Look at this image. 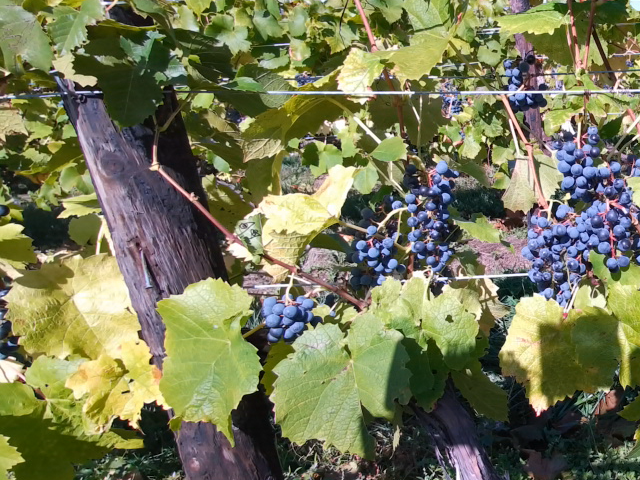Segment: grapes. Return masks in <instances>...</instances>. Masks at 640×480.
Wrapping results in <instances>:
<instances>
[{
    "label": "grapes",
    "mask_w": 640,
    "mask_h": 480,
    "mask_svg": "<svg viewBox=\"0 0 640 480\" xmlns=\"http://www.w3.org/2000/svg\"><path fill=\"white\" fill-rule=\"evenodd\" d=\"M416 171L417 167L414 164H407L405 166L406 173L402 177L403 185L411 190L404 197V201L407 203V211L410 214H415L418 211V205L415 202L419 195L428 199H434L438 196L440 200L439 202H433L432 200L426 202L424 204L426 211H419L417 217H409L407 224L410 227H418L422 223V228L429 232L430 239L438 241L442 236V232L446 235L451 233L449 223L446 220L450 217L448 205L453 201L451 190L455 188L453 180H441V176L457 178L459 171L449 168L447 161H439L436 164V170L431 172L430 181L433 184L430 187L423 184L418 185V179L413 176Z\"/></svg>",
    "instance_id": "b958b902"
},
{
    "label": "grapes",
    "mask_w": 640,
    "mask_h": 480,
    "mask_svg": "<svg viewBox=\"0 0 640 480\" xmlns=\"http://www.w3.org/2000/svg\"><path fill=\"white\" fill-rule=\"evenodd\" d=\"M534 63L535 57L533 55H528L526 57V61L521 60L518 67H514L512 69L513 60L511 58H506L503 61V67L505 68L504 73L507 78H510L507 81V89L518 90L519 86L524 82V78L521 76V73L527 72L529 70V65H533Z\"/></svg>",
    "instance_id": "5460f4e3"
},
{
    "label": "grapes",
    "mask_w": 640,
    "mask_h": 480,
    "mask_svg": "<svg viewBox=\"0 0 640 480\" xmlns=\"http://www.w3.org/2000/svg\"><path fill=\"white\" fill-rule=\"evenodd\" d=\"M423 237V230L421 228H417L416 230H411L407 239L411 243V252L414 254V257L417 260L425 259V263L428 266H432V271L434 273H439L444 267L445 263H447L451 256L455 253V250L452 247H449L447 242H441L438 245V260L434 256H427L426 252H434L436 250V244L434 242L425 243L421 239Z\"/></svg>",
    "instance_id": "f8a65327"
},
{
    "label": "grapes",
    "mask_w": 640,
    "mask_h": 480,
    "mask_svg": "<svg viewBox=\"0 0 640 480\" xmlns=\"http://www.w3.org/2000/svg\"><path fill=\"white\" fill-rule=\"evenodd\" d=\"M508 103L513 113H516L517 111H526L528 108L544 109L547 106V99L541 94L511 95L508 98Z\"/></svg>",
    "instance_id": "83cd7487"
},
{
    "label": "grapes",
    "mask_w": 640,
    "mask_h": 480,
    "mask_svg": "<svg viewBox=\"0 0 640 480\" xmlns=\"http://www.w3.org/2000/svg\"><path fill=\"white\" fill-rule=\"evenodd\" d=\"M360 216L362 219L358 221V226L361 229H366L368 235H375L377 233V227L370 225V219L374 217L373 211L369 207H364L360 210Z\"/></svg>",
    "instance_id": "e5b3c951"
},
{
    "label": "grapes",
    "mask_w": 640,
    "mask_h": 480,
    "mask_svg": "<svg viewBox=\"0 0 640 480\" xmlns=\"http://www.w3.org/2000/svg\"><path fill=\"white\" fill-rule=\"evenodd\" d=\"M630 265V258L626 255H620L618 260L610 257L605 261V267L609 273H617L620 268H626Z\"/></svg>",
    "instance_id": "2adb6a1f"
},
{
    "label": "grapes",
    "mask_w": 640,
    "mask_h": 480,
    "mask_svg": "<svg viewBox=\"0 0 640 480\" xmlns=\"http://www.w3.org/2000/svg\"><path fill=\"white\" fill-rule=\"evenodd\" d=\"M260 316L265 319L264 323L269 332L265 339L269 343H277L282 339L286 342L296 340L308 329L307 323L312 327L323 321L321 316L313 315L311 311L314 301L305 295H298L295 304L287 306L284 302L278 301L270 296L261 302Z\"/></svg>",
    "instance_id": "0513c4c2"
},
{
    "label": "grapes",
    "mask_w": 640,
    "mask_h": 480,
    "mask_svg": "<svg viewBox=\"0 0 640 480\" xmlns=\"http://www.w3.org/2000/svg\"><path fill=\"white\" fill-rule=\"evenodd\" d=\"M383 200L387 203V204H391V208L393 210H400L403 206V202L399 199H395V197L393 195L387 194L383 197Z\"/></svg>",
    "instance_id": "ef6de9ee"
},
{
    "label": "grapes",
    "mask_w": 640,
    "mask_h": 480,
    "mask_svg": "<svg viewBox=\"0 0 640 480\" xmlns=\"http://www.w3.org/2000/svg\"><path fill=\"white\" fill-rule=\"evenodd\" d=\"M399 235L398 243L403 241L402 232H393L389 237H384L381 241L374 239L372 244L374 247H370L365 240H354L352 242L353 252L346 254V261L350 264H362L365 260V264L372 268L371 273L376 275L372 278L369 273L363 274L358 268L354 267L351 270L353 275L350 278L351 286L354 289H360L362 285H380L385 280L383 273H391L396 269L398 273H403L406 270V266L398 261L394 257L397 254V247L394 245Z\"/></svg>",
    "instance_id": "84f90ec7"
},
{
    "label": "grapes",
    "mask_w": 640,
    "mask_h": 480,
    "mask_svg": "<svg viewBox=\"0 0 640 480\" xmlns=\"http://www.w3.org/2000/svg\"><path fill=\"white\" fill-rule=\"evenodd\" d=\"M586 134L588 144L581 149H576L570 131L563 134V139H554L552 148L556 151L557 170L564 174L561 189L571 190L573 200L581 199L584 203H590V206L574 217L575 227L553 223L548 217L532 215V226L526 232L528 245L521 248V255L532 261L534 267L528 270L530 282L536 284L542 296L552 299L554 289L550 286L553 278L557 292L555 301L560 306H566L572 298L571 284L563 280L565 263L560 253L566 249L569 258L566 268L572 272L569 281L577 283L586 272V265L577 258L581 251H584L582 258L585 262H588L593 247L600 254L611 252V242L608 239L610 224H613L612 237L617 239V249L620 252L635 249V262L640 264V234L629 217V208L633 204L632 189L624 185L622 178L614 179L612 185H603L604 179H609L611 174H621L623 165L617 160H609L607 166H594V158L601 154V148L597 146L600 143L599 129L590 125L586 128ZM593 187L596 193H604L606 199L619 196L618 204L626 213L616 206H611L606 212L607 204L600 199H593L591 192L586 190Z\"/></svg>",
    "instance_id": "01657485"
}]
</instances>
